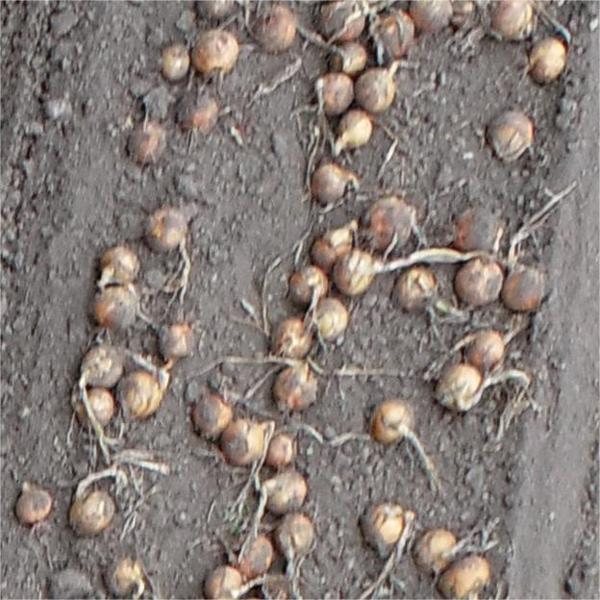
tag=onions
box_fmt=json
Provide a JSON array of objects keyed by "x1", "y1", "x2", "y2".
[
  {"x1": 500, "y1": 268, "x2": 543, "y2": 310},
  {"x1": 183, "y1": 98, "x2": 217, "y2": 130},
  {"x1": 273, "y1": 512, "x2": 315, "y2": 559},
  {"x1": 70, "y1": 488, "x2": 114, "y2": 535},
  {"x1": 332, "y1": 251, "x2": 375, "y2": 293},
  {"x1": 447, "y1": 0, "x2": 479, "y2": 31},
  {"x1": 82, "y1": 345, "x2": 124, "y2": 387},
  {"x1": 222, "y1": 421, "x2": 263, "y2": 466},
  {"x1": 159, "y1": 319, "x2": 194, "y2": 356},
  {"x1": 435, "y1": 364, "x2": 482, "y2": 408},
  {"x1": 311, "y1": 161, "x2": 356, "y2": 202},
  {"x1": 195, "y1": 0, "x2": 236, "y2": 17},
  {"x1": 417, "y1": 527, "x2": 457, "y2": 571},
  {"x1": 457, "y1": 257, "x2": 501, "y2": 303},
  {"x1": 311, "y1": 225, "x2": 351, "y2": 269},
  {"x1": 335, "y1": 41, "x2": 367, "y2": 73},
  {"x1": 455, "y1": 212, "x2": 495, "y2": 252},
  {"x1": 191, "y1": 29, "x2": 238, "y2": 74},
  {"x1": 158, "y1": 43, "x2": 188, "y2": 80},
  {"x1": 237, "y1": 533, "x2": 273, "y2": 576},
  {"x1": 14, "y1": 486, "x2": 50, "y2": 523},
  {"x1": 462, "y1": 330, "x2": 503, "y2": 370},
  {"x1": 98, "y1": 247, "x2": 139, "y2": 286},
  {"x1": 190, "y1": 397, "x2": 229, "y2": 440},
  {"x1": 92, "y1": 287, "x2": 136, "y2": 329},
  {"x1": 202, "y1": 565, "x2": 244, "y2": 598},
  {"x1": 119, "y1": 370, "x2": 166, "y2": 416},
  {"x1": 108, "y1": 556, "x2": 150, "y2": 593},
  {"x1": 435, "y1": 556, "x2": 489, "y2": 598},
  {"x1": 319, "y1": 73, "x2": 356, "y2": 111},
  {"x1": 266, "y1": 434, "x2": 296, "y2": 466},
  {"x1": 261, "y1": 470, "x2": 306, "y2": 513},
  {"x1": 484, "y1": 111, "x2": 532, "y2": 157},
  {"x1": 395, "y1": 265, "x2": 438, "y2": 312},
  {"x1": 410, "y1": 0, "x2": 448, "y2": 37},
  {"x1": 337, "y1": 110, "x2": 373, "y2": 147},
  {"x1": 82, "y1": 386, "x2": 116, "y2": 422},
  {"x1": 363, "y1": 196, "x2": 412, "y2": 252},
  {"x1": 360, "y1": 501, "x2": 408, "y2": 547},
  {"x1": 145, "y1": 207, "x2": 187, "y2": 247},
  {"x1": 274, "y1": 364, "x2": 318, "y2": 409},
  {"x1": 371, "y1": 14, "x2": 410, "y2": 60},
  {"x1": 273, "y1": 318, "x2": 314, "y2": 358},
  {"x1": 354, "y1": 70, "x2": 396, "y2": 111},
  {"x1": 127, "y1": 122, "x2": 168, "y2": 164},
  {"x1": 312, "y1": 299, "x2": 349, "y2": 340},
  {"x1": 369, "y1": 400, "x2": 410, "y2": 441},
  {"x1": 287, "y1": 265, "x2": 328, "y2": 300},
  {"x1": 328, "y1": 5, "x2": 364, "y2": 41},
  {"x1": 249, "y1": 5, "x2": 296, "y2": 49},
  {"x1": 486, "y1": 0, "x2": 535, "y2": 40},
  {"x1": 525, "y1": 35, "x2": 566, "y2": 80}
]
